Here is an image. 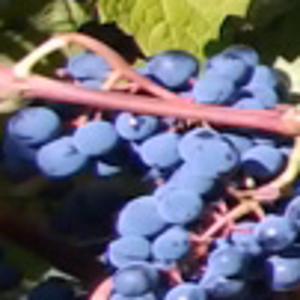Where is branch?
Here are the masks:
<instances>
[{"mask_svg": "<svg viewBox=\"0 0 300 300\" xmlns=\"http://www.w3.org/2000/svg\"><path fill=\"white\" fill-rule=\"evenodd\" d=\"M15 67L0 66V96L91 104L104 109L135 110L162 117H185L217 128H260L289 139L300 136V101L281 102L272 111L235 109L231 105L183 101L132 91H107L97 85H72L61 77L31 68L25 77H18Z\"/></svg>", "mask_w": 300, "mask_h": 300, "instance_id": "1", "label": "branch"}]
</instances>
